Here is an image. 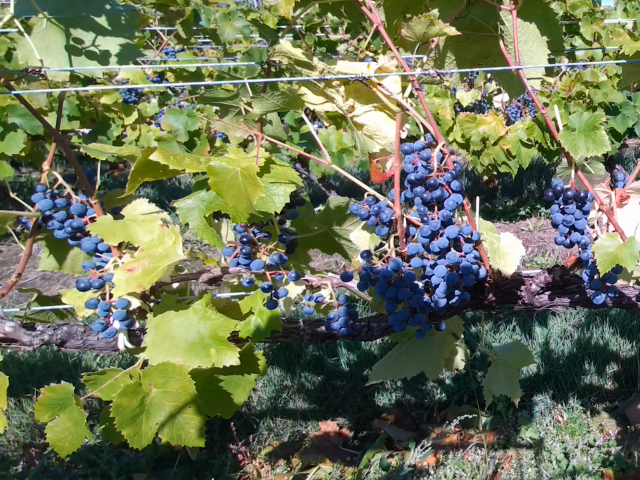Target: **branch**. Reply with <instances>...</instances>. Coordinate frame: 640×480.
Segmentation results:
<instances>
[{
  "label": "branch",
  "instance_id": "obj_1",
  "mask_svg": "<svg viewBox=\"0 0 640 480\" xmlns=\"http://www.w3.org/2000/svg\"><path fill=\"white\" fill-rule=\"evenodd\" d=\"M215 120L218 122H221L222 124H225L231 128H234L236 130L239 131H244L247 132L251 135H255V136H262L265 137L266 139L277 143L280 146H283L284 148H287L288 150L301 155L313 162H315L316 164H321V165H325L331 169H333L335 172H337L340 176L345 177L346 179L353 181L355 183H358L359 185L364 186L365 188H367L374 196H377L381 199H383L385 202H387L391 208L395 211V218L398 221V235H399V241H400V251L402 253L406 252V248H405V238H404V232H403V216L407 217L408 219L412 220L415 224L420 225L421 221L413 214H410L409 212L403 210L402 208H400V188H399V175H400V136H401V124H402V106L398 105L397 106V122H396V133H395V173H394V191H395V202L389 198L386 194L377 191L371 184H369L368 182H366L365 180H362L358 177L352 176L351 174H348L347 172L343 171L342 169H340L338 166H336L335 164L327 161V160H323V159H319L316 156H313L307 152H305L304 150H301L299 148L294 147L293 145L279 139L276 138L274 136H272L271 134H269L268 132L262 131V130H254L251 129L249 127L246 126H241L238 125L236 123H233L227 119H224L223 117L220 116H216Z\"/></svg>",
  "mask_w": 640,
  "mask_h": 480
},
{
  "label": "branch",
  "instance_id": "obj_2",
  "mask_svg": "<svg viewBox=\"0 0 640 480\" xmlns=\"http://www.w3.org/2000/svg\"><path fill=\"white\" fill-rule=\"evenodd\" d=\"M15 99L30 114H32L35 117H37V119L40 121V123L48 130V132L50 134H52L51 139H50V144H49L47 160L43 164V167H42V170H41V173H40V180L42 182H46L48 180L47 176H48V173H49L51 165L54 163L55 153H56V146H57V142H58L59 146H60V149H61L62 153L64 154L65 158L67 159L69 164L75 169V171L77 173V176L79 177L80 182L86 188L85 193L90 197L91 202H92V206L94 208H96L97 215L99 217H102L104 215V208H103L102 204L100 203V201L98 199V196H97V193L95 191V188L87 180L86 175L84 174V171H83L81 165L72 156V154H71V152H70V150H69V148L67 146V143L65 141V137L60 133L61 132L62 123L64 121L63 110H64V107H65V104H66V96L64 94H61L59 96V102H58V105L56 107V121H55L54 127L47 120V118L43 115V113L41 111H39L37 108H34L32 105H30L23 98V96H15Z\"/></svg>",
  "mask_w": 640,
  "mask_h": 480
},
{
  "label": "branch",
  "instance_id": "obj_3",
  "mask_svg": "<svg viewBox=\"0 0 640 480\" xmlns=\"http://www.w3.org/2000/svg\"><path fill=\"white\" fill-rule=\"evenodd\" d=\"M563 156H564V158L567 161V164L569 166L571 164L575 165V174H577L580 177V179L583 182L584 187L586 188L587 192L597 200V202L599 203L601 209L603 210L604 214L606 215L607 219L611 222V225H612L613 229L615 230V232L617 233V235L621 238V240L623 242H626L628 240V236L624 232V230L620 227V224H619L618 220L613 215L611 209L609 208V206L606 203V200L603 198V196L597 190L594 189V187L592 186L589 178L584 173L583 169L581 167L577 166V164L575 163V161H574L573 157L571 156V154L568 151H565L563 153Z\"/></svg>",
  "mask_w": 640,
  "mask_h": 480
},
{
  "label": "branch",
  "instance_id": "obj_4",
  "mask_svg": "<svg viewBox=\"0 0 640 480\" xmlns=\"http://www.w3.org/2000/svg\"><path fill=\"white\" fill-rule=\"evenodd\" d=\"M40 230H41V224L39 222H34L31 225V228L29 229V232L26 237V244L22 252L21 260L16 266L13 276L9 279L7 285L5 287H0V299H4L7 293L11 291L13 287L20 280L22 272L25 268V264L27 262V259L29 258V255L32 252V249L34 247L36 238L38 237Z\"/></svg>",
  "mask_w": 640,
  "mask_h": 480
},
{
  "label": "branch",
  "instance_id": "obj_5",
  "mask_svg": "<svg viewBox=\"0 0 640 480\" xmlns=\"http://www.w3.org/2000/svg\"><path fill=\"white\" fill-rule=\"evenodd\" d=\"M410 81L412 82V84H408L405 87L404 95L402 97V100L406 101L409 98V95H410V93H411V91L413 89V86H414L415 92L417 93V96L419 98L420 104L422 105V109H423L424 113L429 115V120H430L432 129H433V132L435 133V135L440 140V143L442 144L443 154H444L446 165H447L448 168H452L453 164L451 163L450 155H449V152H448V144H447V142L445 140V137L439 131L438 126H437L436 121H435V118H434V115L432 114L431 110L428 107L426 95L420 89V85H419L418 81L416 80L415 76L410 77Z\"/></svg>",
  "mask_w": 640,
  "mask_h": 480
},
{
  "label": "branch",
  "instance_id": "obj_6",
  "mask_svg": "<svg viewBox=\"0 0 640 480\" xmlns=\"http://www.w3.org/2000/svg\"><path fill=\"white\" fill-rule=\"evenodd\" d=\"M358 4L360 6V8L363 10V12L368 16L369 19H371L372 21H374L380 28V30L383 33V36L385 37V40L390 44V46L392 47L395 56L397 58V60L399 61V63L403 66V68L405 69V72H410V66L406 63V61L402 58L401 54H400V50L397 47V44L395 43V41L390 37L388 30L386 29V27L384 26V24L382 23V21L377 18L376 16H374L370 10L367 8V6L365 5V3L362 0L358 1Z\"/></svg>",
  "mask_w": 640,
  "mask_h": 480
},
{
  "label": "branch",
  "instance_id": "obj_7",
  "mask_svg": "<svg viewBox=\"0 0 640 480\" xmlns=\"http://www.w3.org/2000/svg\"><path fill=\"white\" fill-rule=\"evenodd\" d=\"M518 74L521 76L522 82L524 83L526 88L529 90L531 96L533 97V99L537 103V106L539 107V110H540V112L542 114V117L545 119L548 127L550 128V132L554 135L555 138H558L559 137V133L555 129V126H554L553 122L551 121L549 115L547 114L546 109H545L541 99L539 98V96L535 92L533 86L531 85V83L527 79L526 73L524 71H520V72H518Z\"/></svg>",
  "mask_w": 640,
  "mask_h": 480
},
{
  "label": "branch",
  "instance_id": "obj_8",
  "mask_svg": "<svg viewBox=\"0 0 640 480\" xmlns=\"http://www.w3.org/2000/svg\"><path fill=\"white\" fill-rule=\"evenodd\" d=\"M511 33H512V46L514 52V58L516 60V64H521V58L518 50L517 43V31H516V6H511Z\"/></svg>",
  "mask_w": 640,
  "mask_h": 480
},
{
  "label": "branch",
  "instance_id": "obj_9",
  "mask_svg": "<svg viewBox=\"0 0 640 480\" xmlns=\"http://www.w3.org/2000/svg\"><path fill=\"white\" fill-rule=\"evenodd\" d=\"M463 205H464V208H465V212L467 213L466 214V222L471 226L473 231H476L477 230V226H476V224L474 222V215H473L472 209L470 207L469 200L467 198L463 199Z\"/></svg>",
  "mask_w": 640,
  "mask_h": 480
},
{
  "label": "branch",
  "instance_id": "obj_10",
  "mask_svg": "<svg viewBox=\"0 0 640 480\" xmlns=\"http://www.w3.org/2000/svg\"><path fill=\"white\" fill-rule=\"evenodd\" d=\"M477 245H478L479 251H480V253H481V255H482L483 259H484V262L488 267L489 272L491 273L492 276L496 275V271H495L491 261L489 260V257H488V255H487V253L485 251V248L483 246L482 241L478 240L477 241Z\"/></svg>",
  "mask_w": 640,
  "mask_h": 480
},
{
  "label": "branch",
  "instance_id": "obj_11",
  "mask_svg": "<svg viewBox=\"0 0 640 480\" xmlns=\"http://www.w3.org/2000/svg\"><path fill=\"white\" fill-rule=\"evenodd\" d=\"M438 44V40L434 39L428 46L427 49L425 50L423 56L421 57V59L419 60L418 64H417V68L415 70H420L423 67V64L425 63V61L427 60L429 54L431 53L432 49Z\"/></svg>",
  "mask_w": 640,
  "mask_h": 480
}]
</instances>
